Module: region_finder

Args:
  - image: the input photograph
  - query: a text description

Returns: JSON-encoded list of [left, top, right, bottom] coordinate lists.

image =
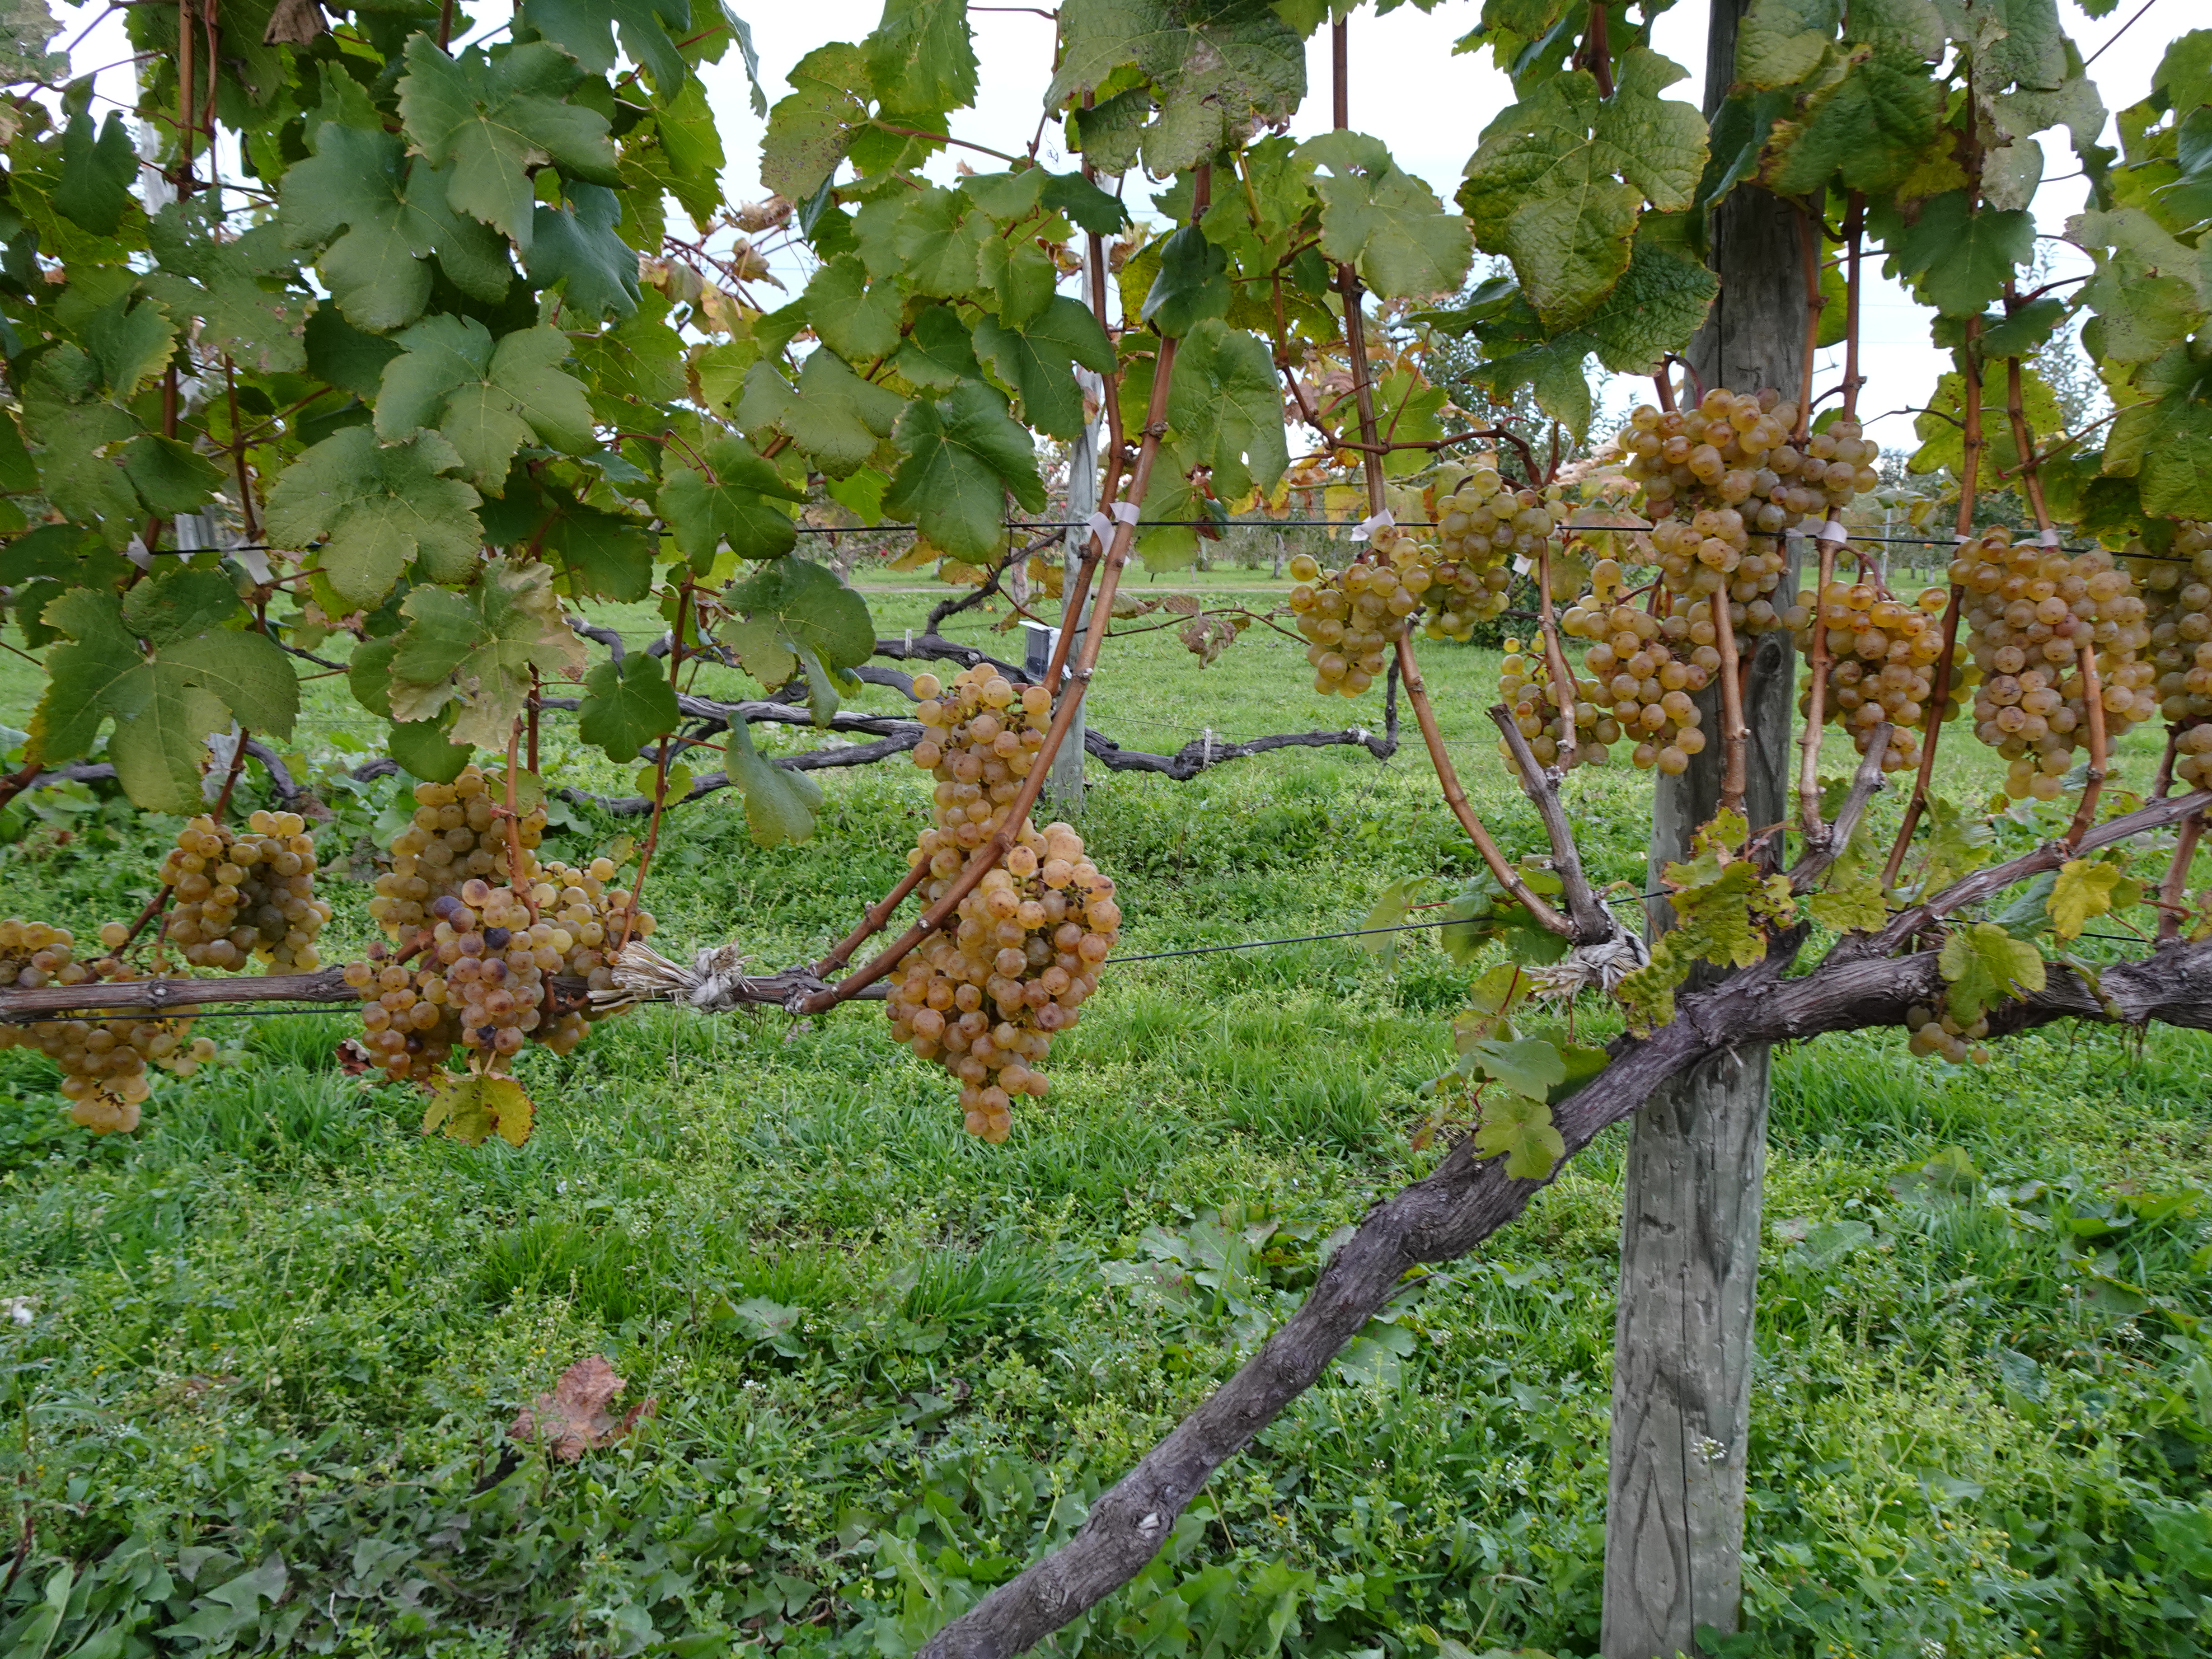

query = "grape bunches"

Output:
[[158, 806, 335, 979], [1612, 382, 1885, 540], [2169, 720, 2212, 810], [880, 931, 1061, 1147], [366, 757, 551, 959], [546, 853, 659, 985], [1557, 556, 1711, 780], [340, 963, 456, 1085], [1286, 523, 1438, 703], [0, 921, 157, 1136], [1983, 641, 2095, 808], [1905, 642, 1990, 733], [1944, 517, 2156, 761], [1648, 518, 1791, 687], [2143, 499, 2212, 717], [1494, 632, 1625, 779], [899, 655, 1061, 923], [1907, 1001, 2005, 1065], [96, 919, 224, 1085], [434, 879, 573, 1061], [954, 818, 1128, 1032], [530, 1004, 599, 1057], [1780, 584, 1950, 773], [1432, 468, 1568, 641]]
